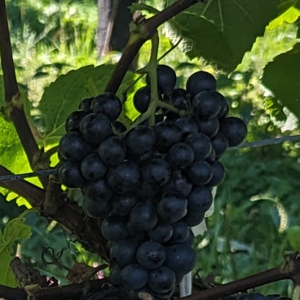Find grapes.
Segmentation results:
<instances>
[{
	"label": "grapes",
	"instance_id": "grapes-1",
	"mask_svg": "<svg viewBox=\"0 0 300 300\" xmlns=\"http://www.w3.org/2000/svg\"><path fill=\"white\" fill-rule=\"evenodd\" d=\"M175 85L174 70L158 66L165 107L129 132L115 121L122 111L116 95L84 99L58 144L60 180L82 187L84 212L103 219L111 281L133 300L170 297L193 269L190 227L202 221L212 189L224 180L217 160L248 135L242 119L226 118L227 102L210 73H193L186 90Z\"/></svg>",
	"mask_w": 300,
	"mask_h": 300
},
{
	"label": "grapes",
	"instance_id": "grapes-2",
	"mask_svg": "<svg viewBox=\"0 0 300 300\" xmlns=\"http://www.w3.org/2000/svg\"><path fill=\"white\" fill-rule=\"evenodd\" d=\"M150 91L146 87H141L135 92L133 103L139 112H145L149 108Z\"/></svg>",
	"mask_w": 300,
	"mask_h": 300
}]
</instances>
